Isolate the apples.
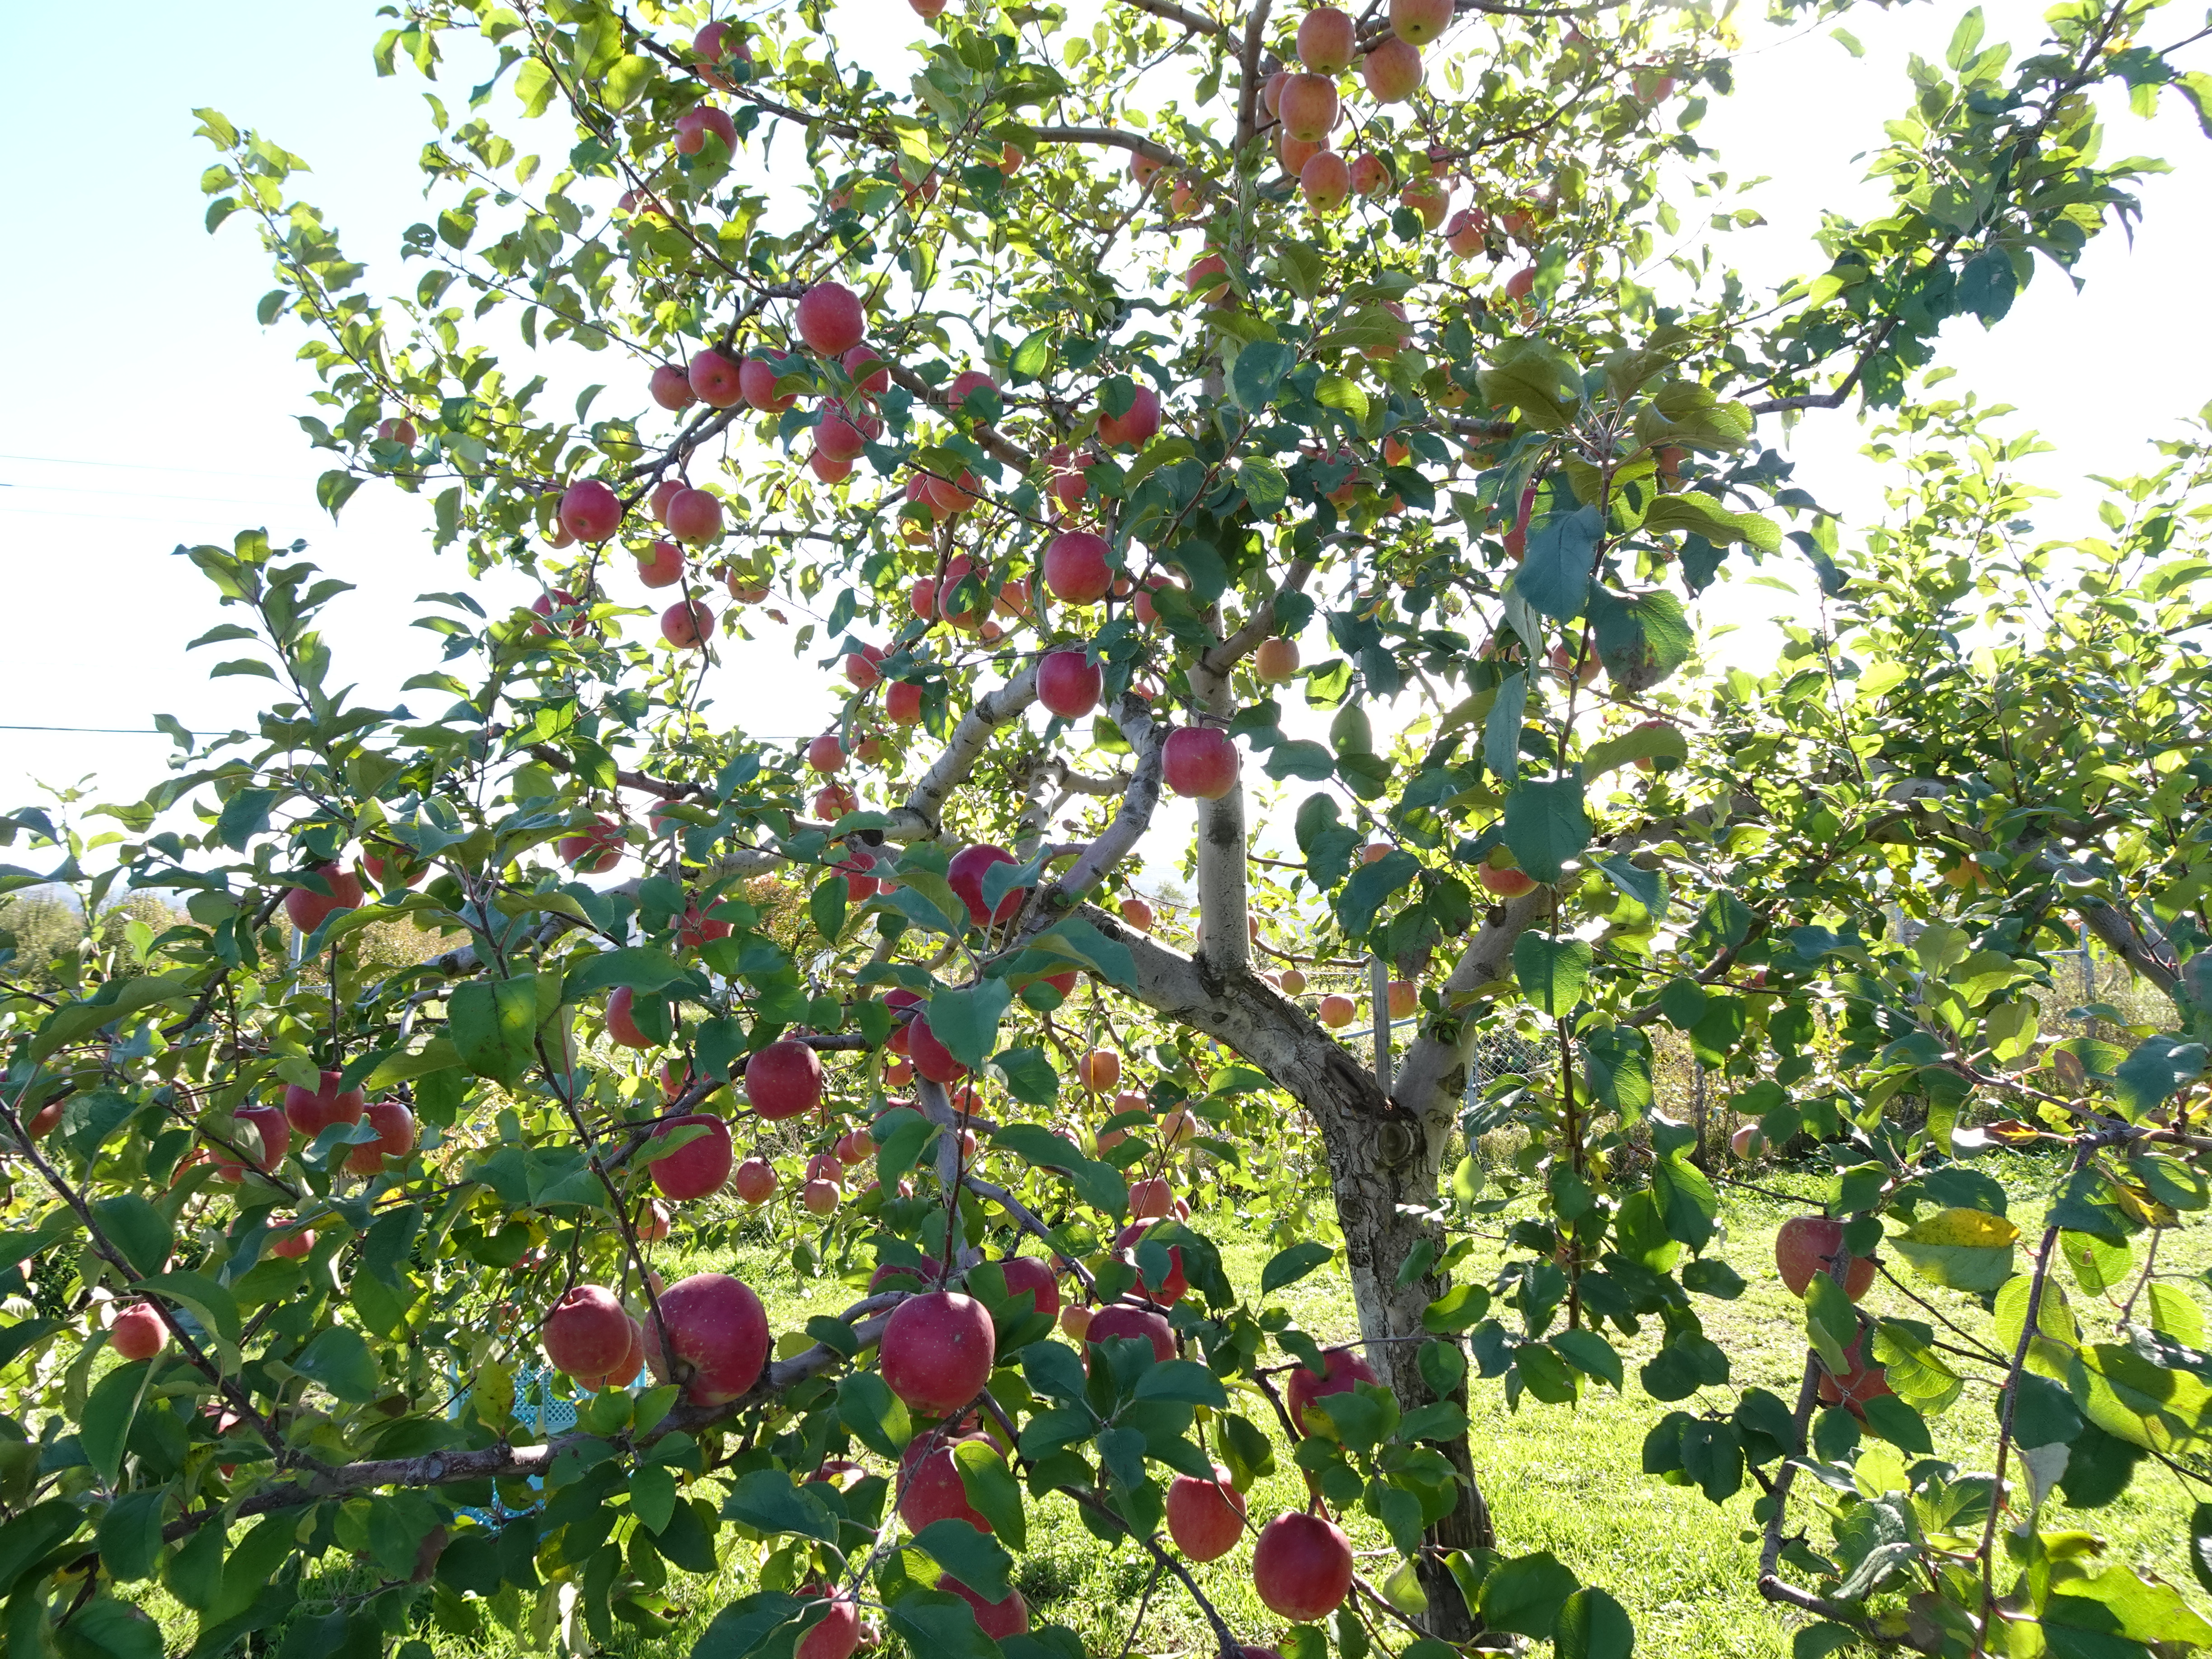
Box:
[865,1180,903,1196]
[783,1028,818,1040]
[999,1256,1059,1328]
[110,1302,169,1360]
[1056,454,1110,514]
[1130,138,1170,187]
[1818,1324,1896,1419]
[1043,530,1115,605]
[1054,512,1085,530]
[1152,1095,1183,1112]
[1309,203,1339,219]
[1505,267,1536,321]
[908,0,947,19]
[1050,1252,1067,1280]
[809,736,847,773]
[1079,1049,1120,1092]
[1355,590,1382,621]
[1331,100,1344,134]
[907,1011,968,1083]
[910,1410,978,1427]
[559,815,625,874]
[636,1205,670,1242]
[852,1126,874,1156]
[1039,1131,1077,1176]
[1388,980,1418,1018]
[897,1425,1008,1535]
[1477,860,1540,898]
[1776,1216,1875,1304]
[1114,1090,1148,1116]
[1483,505,1499,535]
[810,446,853,484]
[910,575,945,622]
[1095,526,1131,551]
[285,1071,364,1138]
[637,542,684,589]
[948,370,999,411]
[689,349,744,408]
[874,1098,925,1167]
[618,190,664,239]
[692,22,752,92]
[745,1041,822,1120]
[882,988,923,1055]
[1017,971,1077,999]
[1630,55,1676,104]
[1480,637,1498,660]
[228,1214,273,1238]
[1111,1217,1189,1307]
[1097,384,1162,447]
[650,480,689,527]
[670,892,734,948]
[1134,576,1177,632]
[1186,254,1230,303]
[1197,923,1201,942]
[727,558,769,604]
[1351,154,1394,197]
[812,397,879,462]
[607,985,659,1049]
[511,1249,546,1272]
[927,468,982,512]
[1281,970,1306,995]
[1253,1512,1353,1621]
[882,1057,913,1086]
[954,1086,984,1116]
[1319,995,1355,1028]
[1264,72,1295,119]
[880,1292,995,1412]
[1154,176,1188,191]
[560,479,622,542]
[1255,638,1299,684]
[1300,152,1351,210]
[982,143,1023,175]
[944,554,989,580]
[886,680,923,726]
[829,186,854,213]
[1171,188,1207,217]
[1401,180,1449,231]
[1632,722,1669,772]
[1296,8,1355,76]
[1261,974,1281,990]
[673,106,738,163]
[589,1144,619,1173]
[198,1404,238,1483]
[660,1058,691,1097]
[815,783,859,822]
[850,724,887,764]
[1121,899,1152,931]
[736,1157,777,1204]
[643,1272,768,1405]
[1502,191,1537,241]
[1281,131,1329,177]
[1389,494,1406,514]
[1658,448,1690,493]
[1288,1346,1379,1449]
[1248,909,1259,943]
[889,160,937,207]
[543,1284,631,1378]
[938,575,990,631]
[906,472,949,521]
[993,581,1026,617]
[648,1113,732,1200]
[1278,73,1337,142]
[1492,405,1506,422]
[841,346,888,401]
[1022,606,1032,617]
[1164,1110,1197,1143]
[1166,1465,1247,1561]
[1548,644,1580,691]
[1129,1177,1173,1219]
[943,1082,955,1096]
[879,879,897,895]
[1100,576,1130,602]
[1023,571,1056,609]
[649,800,688,840]
[1564,31,1599,63]
[810,1098,837,1125]
[805,1179,839,1216]
[813,351,839,360]
[209,1105,290,1183]
[1362,35,1423,103]
[649,1272,663,1298]
[883,642,908,656]
[947,844,1024,927]
[1096,1127,1127,1160]
[1134,682,1153,701]
[542,516,575,549]
[978,621,1002,652]
[1387,0,1455,46]
[378,418,417,450]
[1313,449,1359,513]
[1499,488,1537,562]
[1042,443,1083,497]
[805,1461,870,1494]
[1061,1303,1097,1340]
[1083,1303,1176,1375]
[1430,147,1449,177]
[957,1129,976,1162]
[1168,1198,1191,1222]
[830,852,879,901]
[530,589,587,639]
[795,281,866,355]
[1362,843,1395,865]
[0,1069,64,1141]
[1162,726,1240,799]
[1036,651,1102,719]
[1732,1123,1766,1161]
[661,600,714,649]
[1462,435,1495,471]
[1551,639,1600,687]
[666,489,722,545]
[363,847,430,887]
[692,1070,712,1085]
[1516,175,1558,225]
[1446,208,1488,258]
[1385,432,1410,466]
[572,1315,645,1392]
[651,364,697,411]
[272,1219,314,1258]
[1204,240,1221,250]
[793,1582,860,1659]
[868,1254,940,1318]
[285,862,364,935]
[345,1101,414,1175]
[276,1076,296,1107]
[1046,511,1058,535]
[846,643,886,689]
[1359,303,1411,361]
[1435,363,1471,408]
[496,1301,521,1333]
[1150,1106,1164,1131]
[900,1181,913,1200]
[936,1573,1028,1640]
[806,1155,842,1185]
[836,1132,868,1165]
[170,1151,211,1187]
[739,348,798,413]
